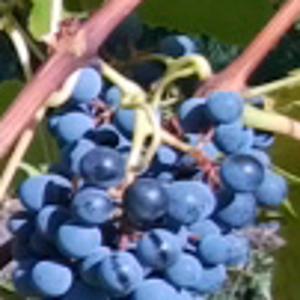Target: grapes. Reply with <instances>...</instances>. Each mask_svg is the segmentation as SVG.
Instances as JSON below:
<instances>
[{
    "label": "grapes",
    "mask_w": 300,
    "mask_h": 300,
    "mask_svg": "<svg viewBox=\"0 0 300 300\" xmlns=\"http://www.w3.org/2000/svg\"><path fill=\"white\" fill-rule=\"evenodd\" d=\"M156 48L168 58H181L193 51L191 39L177 34L165 35L157 41Z\"/></svg>",
    "instance_id": "grapes-2"
},
{
    "label": "grapes",
    "mask_w": 300,
    "mask_h": 300,
    "mask_svg": "<svg viewBox=\"0 0 300 300\" xmlns=\"http://www.w3.org/2000/svg\"><path fill=\"white\" fill-rule=\"evenodd\" d=\"M146 87L150 100L118 107L123 91L86 66L49 116L61 164L21 182L26 209L5 225L21 296L205 300L249 252L230 232L285 201L276 136L242 120L240 94L188 96L158 76Z\"/></svg>",
    "instance_id": "grapes-1"
}]
</instances>
